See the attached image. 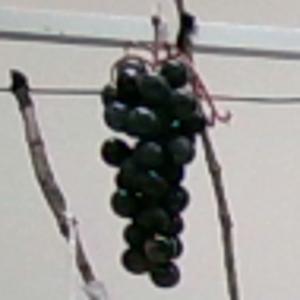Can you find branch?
<instances>
[{
  "label": "branch",
  "mask_w": 300,
  "mask_h": 300,
  "mask_svg": "<svg viewBox=\"0 0 300 300\" xmlns=\"http://www.w3.org/2000/svg\"><path fill=\"white\" fill-rule=\"evenodd\" d=\"M201 136L205 164L211 177L215 192V207L218 214L219 235L222 247L224 276L227 283V297L229 300H240V286L238 285V271L236 269V249L234 242V217L224 191L222 165L214 152L213 141L210 139L209 126Z\"/></svg>",
  "instance_id": "2"
},
{
  "label": "branch",
  "mask_w": 300,
  "mask_h": 300,
  "mask_svg": "<svg viewBox=\"0 0 300 300\" xmlns=\"http://www.w3.org/2000/svg\"><path fill=\"white\" fill-rule=\"evenodd\" d=\"M178 15V29L174 39L173 57L181 58L192 68L193 77L189 83L191 90L201 97L194 73V42L199 32L197 14L186 9L184 0H172Z\"/></svg>",
  "instance_id": "3"
},
{
  "label": "branch",
  "mask_w": 300,
  "mask_h": 300,
  "mask_svg": "<svg viewBox=\"0 0 300 300\" xmlns=\"http://www.w3.org/2000/svg\"><path fill=\"white\" fill-rule=\"evenodd\" d=\"M10 75V93L17 101L23 120L24 141L29 146V158L37 184L45 203L53 214L59 227V234L67 248L74 252L73 265L84 284L88 300H110L100 277L86 259L77 225L80 220L72 216L56 172L47 157L42 129L37 120L36 102L31 91L29 77L16 67L8 69Z\"/></svg>",
  "instance_id": "1"
}]
</instances>
